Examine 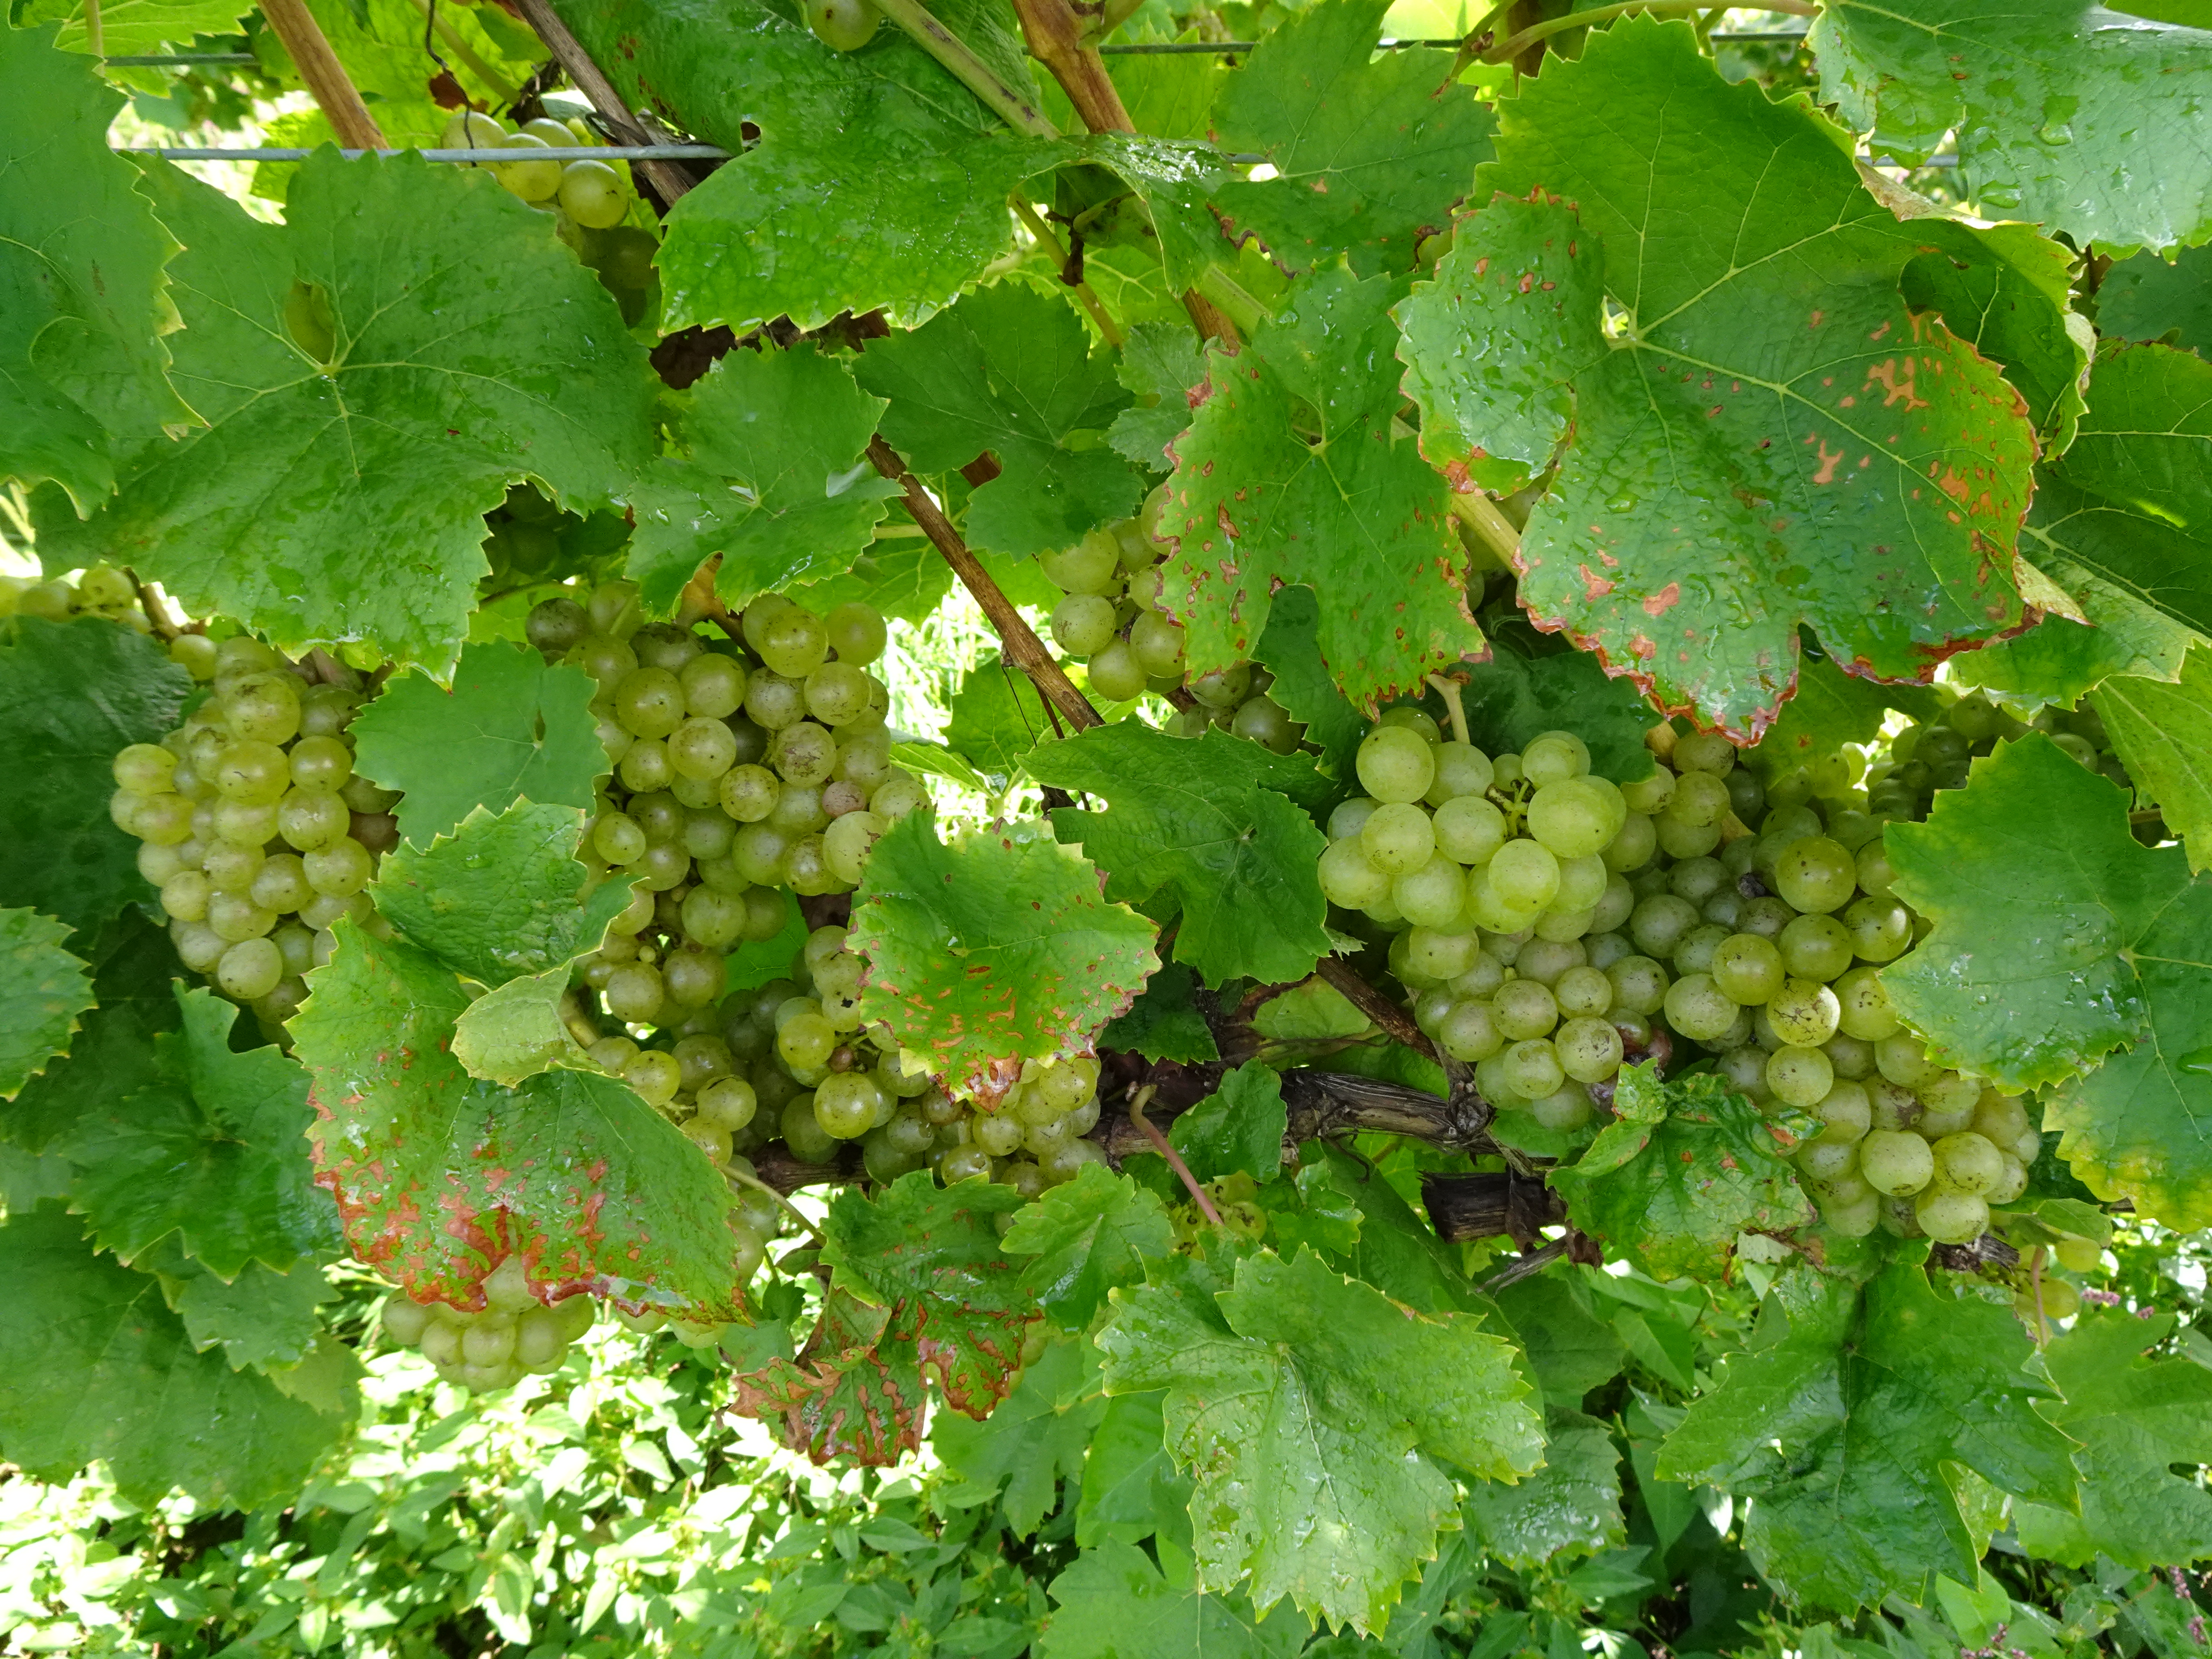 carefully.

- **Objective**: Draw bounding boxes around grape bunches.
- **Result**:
[672,976,824,1155]
[513,578,931,1037]
[1712,836,2039,1244]
[381,1254,595,1395]
[584,1031,756,1167]
[1315,706,1655,1131]
[2006,1226,2103,1319]
[442,110,661,331]
[0,566,153,642]
[1453,393,1578,613]
[1165,667,1302,756]
[776,925,936,1184]
[1866,696,2135,823]
[1038,480,1186,702]
[476,479,636,594]
[616,1154,779,1370]
[1631,725,1875,1050]
[886,1052,1100,1235]
[800,0,886,51]
[110,635,405,1048]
